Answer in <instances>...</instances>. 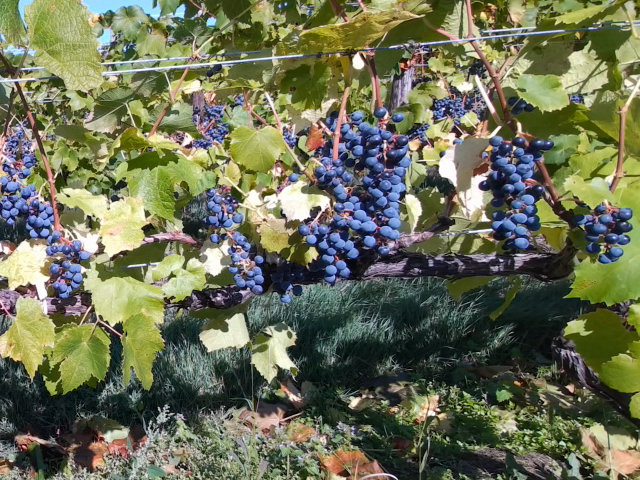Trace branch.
<instances>
[{
    "instance_id": "170604dd",
    "label": "branch",
    "mask_w": 640,
    "mask_h": 480,
    "mask_svg": "<svg viewBox=\"0 0 640 480\" xmlns=\"http://www.w3.org/2000/svg\"><path fill=\"white\" fill-rule=\"evenodd\" d=\"M471 45L474 48V50L477 52V54L481 57L482 62L487 67L488 72H489L490 76L492 77L494 84L496 85L499 101H500V103H501V105H502V107L504 109L502 123L505 124L506 126H508L513 133H516L517 132V126H516L515 121L513 119H510L511 118V112H510L509 106H508V104H507V102H506V100L504 98V94H503V90H502V87H501V83L498 80L497 74L493 70V67H492L491 63L487 60V56L484 54V52L478 46L477 42L475 40L471 41Z\"/></svg>"
},
{
    "instance_id": "2b1400db",
    "label": "branch",
    "mask_w": 640,
    "mask_h": 480,
    "mask_svg": "<svg viewBox=\"0 0 640 480\" xmlns=\"http://www.w3.org/2000/svg\"><path fill=\"white\" fill-rule=\"evenodd\" d=\"M0 61L3 64V66L6 68V70L11 74V78L12 79L17 78L15 70L11 67V65L8 63V61L6 60V58L2 53H0Z\"/></svg>"
},
{
    "instance_id": "1af6ec82",
    "label": "branch",
    "mask_w": 640,
    "mask_h": 480,
    "mask_svg": "<svg viewBox=\"0 0 640 480\" xmlns=\"http://www.w3.org/2000/svg\"><path fill=\"white\" fill-rule=\"evenodd\" d=\"M467 6H468V10L466 13V25L468 27V36H472L474 35V29H473V25L471 23V16H472V12H473V3L472 0H467Z\"/></svg>"
},
{
    "instance_id": "1d269e1b",
    "label": "branch",
    "mask_w": 640,
    "mask_h": 480,
    "mask_svg": "<svg viewBox=\"0 0 640 480\" xmlns=\"http://www.w3.org/2000/svg\"><path fill=\"white\" fill-rule=\"evenodd\" d=\"M369 63L370 66L373 70V76H374V80H375V90H376V102L378 106H382L383 102L381 99V88H380V78H379V73H378V68L375 64V60L373 57L369 58Z\"/></svg>"
},
{
    "instance_id": "8bde2521",
    "label": "branch",
    "mask_w": 640,
    "mask_h": 480,
    "mask_svg": "<svg viewBox=\"0 0 640 480\" xmlns=\"http://www.w3.org/2000/svg\"><path fill=\"white\" fill-rule=\"evenodd\" d=\"M249 113L254 117V119H255V120H257V121H258L259 123H261L262 125H264V126H266V127H269V126H270V123H269L267 120H265L264 118L260 117V116L255 112V110H254V109H250V110H249Z\"/></svg>"
},
{
    "instance_id": "30e6481e",
    "label": "branch",
    "mask_w": 640,
    "mask_h": 480,
    "mask_svg": "<svg viewBox=\"0 0 640 480\" xmlns=\"http://www.w3.org/2000/svg\"><path fill=\"white\" fill-rule=\"evenodd\" d=\"M17 93L19 94L20 98H21V102L28 114V118H29V123L31 124V128L32 131L34 132V136L36 139V142L38 144L39 147V152L41 153L42 159L44 161L45 164V170H46V174L48 176V181H49V188H50V197H51V201L53 204V215H54V231L55 232H59L60 231V215L58 212V202L56 199V194H55V180L53 178V173L51 171V167H50V162H49V158L46 154V151L44 149V145H43V141L41 139V136L39 134V129L37 128V125L34 121V115L33 112L31 110V107L29 106L27 100H26V96L21 88L20 83H15L14 84Z\"/></svg>"
},
{
    "instance_id": "325d2c04",
    "label": "branch",
    "mask_w": 640,
    "mask_h": 480,
    "mask_svg": "<svg viewBox=\"0 0 640 480\" xmlns=\"http://www.w3.org/2000/svg\"><path fill=\"white\" fill-rule=\"evenodd\" d=\"M639 89H640V77H638L635 80V83L631 87V90L629 91L628 95L626 96V99L619 113L618 136H619L620 145H619V151H618V157H617L616 176L608 185V190L611 193H614L616 191L617 185L623 179L624 159H625L626 147H627V138L625 134L626 116L628 113V109L633 101V98L635 97Z\"/></svg>"
},
{
    "instance_id": "982ccf7c",
    "label": "branch",
    "mask_w": 640,
    "mask_h": 480,
    "mask_svg": "<svg viewBox=\"0 0 640 480\" xmlns=\"http://www.w3.org/2000/svg\"><path fill=\"white\" fill-rule=\"evenodd\" d=\"M349 90H350V85L346 84L345 87H344L342 101L340 103V113H339L338 123H337V127H336V136H335L334 145H333V158L334 159H338L339 158L338 148H339V143H340V138H341V130H342L343 120H344V116H345V106H346V101L348 99Z\"/></svg>"
},
{
    "instance_id": "45aa463d",
    "label": "branch",
    "mask_w": 640,
    "mask_h": 480,
    "mask_svg": "<svg viewBox=\"0 0 640 480\" xmlns=\"http://www.w3.org/2000/svg\"><path fill=\"white\" fill-rule=\"evenodd\" d=\"M260 5L259 1L252 3L251 5L241 9L237 12V14L229 20L226 24H224L221 28L217 29L212 33L199 47L195 50V52L188 59V63L193 64L194 60L200 55V53L220 34L224 33L228 28H230L234 23L238 22L242 15L246 14L249 11H252L254 8Z\"/></svg>"
},
{
    "instance_id": "ea751061",
    "label": "branch",
    "mask_w": 640,
    "mask_h": 480,
    "mask_svg": "<svg viewBox=\"0 0 640 480\" xmlns=\"http://www.w3.org/2000/svg\"><path fill=\"white\" fill-rule=\"evenodd\" d=\"M537 168H538L540 174L542 175V178L544 179V183H545V186L548 189V192L553 196L554 201L558 202L560 200L559 194H558V192H557V190H556V188H555V186L553 184V181H552L549 173L547 172V169H546V167H545V165L543 164L542 161H539L537 163Z\"/></svg>"
},
{
    "instance_id": "1ff4a987",
    "label": "branch",
    "mask_w": 640,
    "mask_h": 480,
    "mask_svg": "<svg viewBox=\"0 0 640 480\" xmlns=\"http://www.w3.org/2000/svg\"><path fill=\"white\" fill-rule=\"evenodd\" d=\"M191 71V69L186 68L184 73L182 74V77L180 78V80L178 81L174 93L172 94V96L170 97V99L168 100L167 105L163 108V110L161 111L160 116L157 118V120L155 121V123L153 124L151 130L147 133L148 137H152L156 131L157 128L159 127V125L161 124V122L163 121V119L165 118L166 114L168 113L169 109L172 107L173 103H174V97L175 95L178 93L181 85L183 84L186 76L188 75V72Z\"/></svg>"
},
{
    "instance_id": "ca6c30ca",
    "label": "branch",
    "mask_w": 640,
    "mask_h": 480,
    "mask_svg": "<svg viewBox=\"0 0 640 480\" xmlns=\"http://www.w3.org/2000/svg\"><path fill=\"white\" fill-rule=\"evenodd\" d=\"M285 150L287 151L288 155L290 156L291 160L293 161V163L296 165V167L312 182L315 183L316 182V178L300 163V161L297 159L296 155L294 154L293 150L291 149L290 145L288 143L284 144Z\"/></svg>"
}]
</instances>
